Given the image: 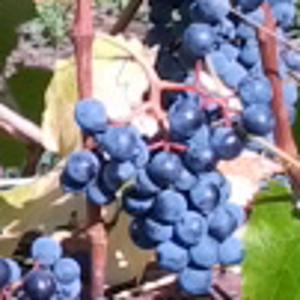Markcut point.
Masks as SVG:
<instances>
[{
	"label": "cut point",
	"mask_w": 300,
	"mask_h": 300,
	"mask_svg": "<svg viewBox=\"0 0 300 300\" xmlns=\"http://www.w3.org/2000/svg\"><path fill=\"white\" fill-rule=\"evenodd\" d=\"M94 32V37L101 38L115 47H118L123 53L127 54L133 58L137 63H139L147 76L151 88H150V97H149V106L151 108H160L161 107V90H177V91H186L189 92L191 87L188 84L176 83L170 79H160L158 75L153 71L149 62L140 54L133 52V50L125 44H122L116 38L109 36L105 33Z\"/></svg>",
	"instance_id": "obj_1"
}]
</instances>
